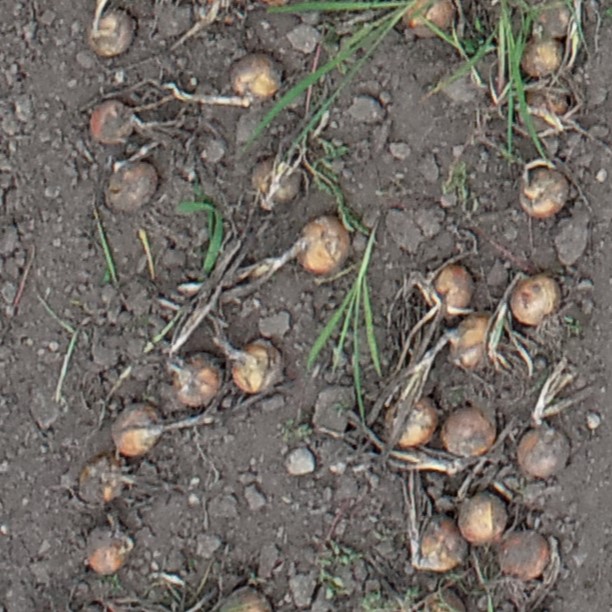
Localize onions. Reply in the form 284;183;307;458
518;160;567;216
528;91;566;131
390;400;438;446
81;453;123;496
88;7;132;57
86;102;132;146
413;518;469;570
450;314;493;367
425;589;466;612
220;588;271;610
454;493;504;542
253;157;304;205
175;356;220;405
520;37;561;77
515;426;568;476
104;160;156;210
440;405;493;456
404;0;455;38
111;403;161;458
294;215;349;274
231;52;280;100
431;263;471;310
87;533;130;576
495;530;547;579
229;340;276;391
511;274;557;323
